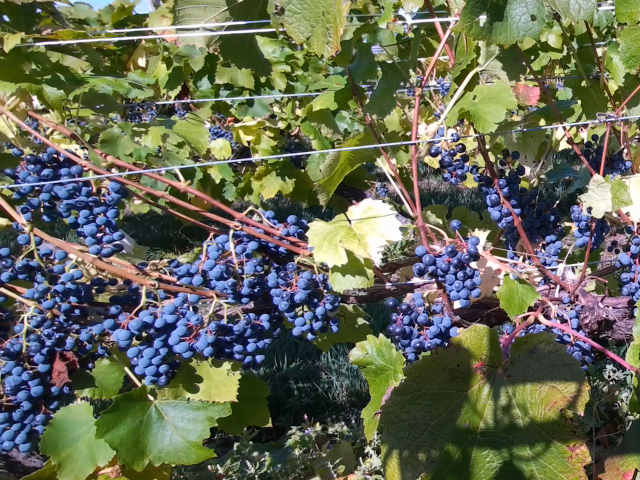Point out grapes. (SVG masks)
Returning a JSON list of instances; mask_svg holds the SVG:
<instances>
[{"mask_svg":"<svg viewBox=\"0 0 640 480\" xmlns=\"http://www.w3.org/2000/svg\"><path fill=\"white\" fill-rule=\"evenodd\" d=\"M633 162L629 160H623L619 154H614L611 157V164L607 165L604 169V173L608 175V179L613 181L615 176H619L621 173H625L631 169Z\"/></svg>","mask_w":640,"mask_h":480,"instance_id":"grapes-16","label":"grapes"},{"mask_svg":"<svg viewBox=\"0 0 640 480\" xmlns=\"http://www.w3.org/2000/svg\"><path fill=\"white\" fill-rule=\"evenodd\" d=\"M216 244H208L206 247L207 260L202 263V270L199 266L203 259V254L199 253L193 262L180 264L178 259L172 258L168 262L166 271H172L171 276L176 277L182 285H192L201 287L207 285L210 290H217L226 293V301L229 304L238 303L247 305L251 299L262 297L269 291L271 303L277 306L278 312L282 315L246 313L243 319L237 324L221 318L219 321H211L207 328H203L194 335V341L189 344L182 337L189 338L193 330L187 325H201L204 321L202 314H197L188 307L197 304L202 296L179 292L176 300L166 303L161 309L151 307L141 310L137 318L127 322V328H120L114 318L103 319L101 323L89 321L87 324H80L87 314L86 307H75L73 303L86 304L94 300V292L104 293L106 286H117L119 281L116 278H109L107 281L102 277H95L85 282H73L84 276L83 270H75L76 264L68 260L63 265H55L48 268L50 274V285H44L48 277L44 273L43 267L36 260L23 259L15 264L10 259L11 249L2 247L0 249V269L4 270L0 274V283H10L11 281L24 280L33 282V287L25 291L23 298L36 301L40 306L34 308L30 315V327L41 330V333L32 332L25 336L28 342L26 354L33 358L32 362L37 365L36 371L45 374L51 367L50 362H45L55 351L72 350L76 347L75 337L69 333L78 334L81 343L88 342L94 335L101 334L107 330L111 334V339L117 343L118 350L126 353L129 364L135 366V375H145L146 385L157 384L165 387L170 384V380L176 377V371L181 366L179 360L170 363H162L171 348V352L180 355L182 360L191 358L195 353H202L205 358L215 357L217 361L236 360L243 365L262 364L266 360L264 353L251 354L257 349H268L271 343L282 334L286 325L282 323L284 317L290 324H293L289 331L290 337H301L307 333L306 340L314 341L317 332L336 334L339 332L340 319L326 315L327 312H337L342 302L338 295L324 294L323 301L317 298L308 299L312 291L319 288L332 290L330 282L327 281L326 273L314 275L312 271H299L297 290L283 291L281 286L288 288L294 280L293 272L298 269L296 262H288L286 265L271 263L273 269L263 277L257 275L253 279H244L241 288L238 290V283L235 279L236 264L234 259H229L222 263L217 260L229 252L230 243L228 233L218 234L214 238ZM210 241L209 243H214ZM302 304H306L310 311L304 312L301 316L295 309ZM57 305L61 314L56 318L49 319L45 311H52Z\"/></svg>","mask_w":640,"mask_h":480,"instance_id":"grapes-1","label":"grapes"},{"mask_svg":"<svg viewBox=\"0 0 640 480\" xmlns=\"http://www.w3.org/2000/svg\"><path fill=\"white\" fill-rule=\"evenodd\" d=\"M583 309V306L581 304H578L574 307V309H572L569 313H568V317L570 320V324H571V329L573 332H577L579 333L580 336L583 337H587L588 333L586 332L585 329H580L577 330V328L580 326V311Z\"/></svg>","mask_w":640,"mask_h":480,"instance_id":"grapes-18","label":"grapes"},{"mask_svg":"<svg viewBox=\"0 0 640 480\" xmlns=\"http://www.w3.org/2000/svg\"><path fill=\"white\" fill-rule=\"evenodd\" d=\"M106 189L108 191L102 194L105 199L103 202L99 197H90L92 185L89 180L41 186L42 192L38 198H30L18 210L30 222L33 219L32 210H38L43 203L46 211L40 216L42 222H55L58 216L67 219L68 227L76 229V236L85 239V243L91 246V255L111 258L125 250L122 243H115L125 238V233L117 226L116 218L120 216V209L116 206L121 198H129L131 192L123 188L120 182L114 181H109Z\"/></svg>","mask_w":640,"mask_h":480,"instance_id":"grapes-2","label":"grapes"},{"mask_svg":"<svg viewBox=\"0 0 640 480\" xmlns=\"http://www.w3.org/2000/svg\"><path fill=\"white\" fill-rule=\"evenodd\" d=\"M424 306L425 300L423 299V294L414 292L412 294V302H401L399 304V311L403 313L400 323H394L399 321V315L397 313H391V322L387 324L389 334L395 335L393 343L397 344L402 350H405L409 362L416 360V352L433 350L436 345L442 346L444 343L449 342L450 337H457L459 335V328L452 327L453 320L449 316L433 317L429 329L424 330L425 335L419 333L417 328L410 327L411 320H414L419 325L429 323L427 311L419 313L417 310H413L415 308H423Z\"/></svg>","mask_w":640,"mask_h":480,"instance_id":"grapes-7","label":"grapes"},{"mask_svg":"<svg viewBox=\"0 0 640 480\" xmlns=\"http://www.w3.org/2000/svg\"><path fill=\"white\" fill-rule=\"evenodd\" d=\"M94 348L92 343H86L84 346L79 345L76 348V353L80 356L88 355L84 360V368L86 370H92L95 367V362L101 357H109L111 355V351L106 347L99 345L94 352H90Z\"/></svg>","mask_w":640,"mask_h":480,"instance_id":"grapes-14","label":"grapes"},{"mask_svg":"<svg viewBox=\"0 0 640 480\" xmlns=\"http://www.w3.org/2000/svg\"><path fill=\"white\" fill-rule=\"evenodd\" d=\"M570 218L574 221L576 227L573 230V237L576 238L575 246L584 247L587 251L588 239H592L590 254L593 250H598L600 245L605 241V235L610 232V226L607 224L605 217L598 218L595 222V229L592 234L590 225L591 217L589 215H581V208L577 204L570 207Z\"/></svg>","mask_w":640,"mask_h":480,"instance_id":"grapes-11","label":"grapes"},{"mask_svg":"<svg viewBox=\"0 0 640 480\" xmlns=\"http://www.w3.org/2000/svg\"><path fill=\"white\" fill-rule=\"evenodd\" d=\"M23 338H12L5 348L0 349V379L2 393L11 404L17 405L14 411L0 413V452H9L15 445L21 452H29L33 440L28 433L42 434L46 430L44 424L48 420L46 413L38 414L32 411V398H37L45 392L42 380L35 376L32 369H26L23 353Z\"/></svg>","mask_w":640,"mask_h":480,"instance_id":"grapes-3","label":"grapes"},{"mask_svg":"<svg viewBox=\"0 0 640 480\" xmlns=\"http://www.w3.org/2000/svg\"><path fill=\"white\" fill-rule=\"evenodd\" d=\"M271 237H274V238H276V239H278V240H280V241H282V242H286L287 244H290V245H291V242H290V241H287V240H285V239H283V238H280L279 236H276V235H274V234H271Z\"/></svg>","mask_w":640,"mask_h":480,"instance_id":"grapes-23","label":"grapes"},{"mask_svg":"<svg viewBox=\"0 0 640 480\" xmlns=\"http://www.w3.org/2000/svg\"><path fill=\"white\" fill-rule=\"evenodd\" d=\"M260 214L264 216V219L268 221L271 225H274L276 228H281L283 226L282 222H279L278 219H274L275 211L274 210H261Z\"/></svg>","mask_w":640,"mask_h":480,"instance_id":"grapes-21","label":"grapes"},{"mask_svg":"<svg viewBox=\"0 0 640 480\" xmlns=\"http://www.w3.org/2000/svg\"><path fill=\"white\" fill-rule=\"evenodd\" d=\"M611 245L612 246L607 248V251L609 253L614 251V253L618 255L614 266L621 268L623 265H629L630 267V270L620 274V281L625 283L620 289V294L625 297H630L633 301H638L640 299V263L635 259L640 252V237L638 235L631 237L628 253L621 252L619 248L614 250L613 247L618 245L616 240H613Z\"/></svg>","mask_w":640,"mask_h":480,"instance_id":"grapes-10","label":"grapes"},{"mask_svg":"<svg viewBox=\"0 0 640 480\" xmlns=\"http://www.w3.org/2000/svg\"><path fill=\"white\" fill-rule=\"evenodd\" d=\"M56 150L48 147L46 153L41 156L24 152L14 147L11 151L13 157H22L25 167L17 165L15 168L6 167L4 174L13 179V183H21L28 181H47L58 178L75 177L83 172V167L71 160L64 154H60L59 158L54 155Z\"/></svg>","mask_w":640,"mask_h":480,"instance_id":"grapes-8","label":"grapes"},{"mask_svg":"<svg viewBox=\"0 0 640 480\" xmlns=\"http://www.w3.org/2000/svg\"><path fill=\"white\" fill-rule=\"evenodd\" d=\"M601 154H602V147L598 146L595 150V157L594 158H590L591 155V151L589 149L585 150V160L588 161V165L595 171V172H599L600 171V164H601Z\"/></svg>","mask_w":640,"mask_h":480,"instance_id":"grapes-20","label":"grapes"},{"mask_svg":"<svg viewBox=\"0 0 640 480\" xmlns=\"http://www.w3.org/2000/svg\"><path fill=\"white\" fill-rule=\"evenodd\" d=\"M39 257L47 259L53 255V259L57 261L65 260L68 257V252L63 249H56L54 252L50 247H41L38 250Z\"/></svg>","mask_w":640,"mask_h":480,"instance_id":"grapes-19","label":"grapes"},{"mask_svg":"<svg viewBox=\"0 0 640 480\" xmlns=\"http://www.w3.org/2000/svg\"><path fill=\"white\" fill-rule=\"evenodd\" d=\"M499 172L500 175L497 186L500 188L502 196L510 199V205H512V209H514L516 215L523 218L522 228L525 229L527 238L531 243H539L541 236L547 242L544 247L545 253L536 251V255L542 262V265L545 267L553 263L559 264L558 254L562 252V242L558 240V236L554 234L555 231H563L562 225L556 226L557 223L561 221V218L557 216L559 209L553 207L550 210V215L545 216L543 215V211L546 209V206L553 205V200L547 199L545 203L539 202L536 209V215L539 218L535 219L533 209L528 207V202L537 197V191L531 190L529 196L525 197L527 189L525 187L519 189V184L521 183L519 176L525 175V166L519 164L516 171H509V176H505L506 170L503 168H500Z\"/></svg>","mask_w":640,"mask_h":480,"instance_id":"grapes-5","label":"grapes"},{"mask_svg":"<svg viewBox=\"0 0 640 480\" xmlns=\"http://www.w3.org/2000/svg\"><path fill=\"white\" fill-rule=\"evenodd\" d=\"M234 241H240L235 245L234 258L235 259H250L243 261V269L238 268L237 274H252V273H261L264 270L265 265L270 264V257L264 256L262 259L251 258L252 254L255 250H258L260 247V243L262 245H266L270 251L277 252L280 256H285L288 254V249L283 247H279L274 243L267 242L263 238H253L252 235L247 234L244 231L235 230L233 233Z\"/></svg>","mask_w":640,"mask_h":480,"instance_id":"grapes-9","label":"grapes"},{"mask_svg":"<svg viewBox=\"0 0 640 480\" xmlns=\"http://www.w3.org/2000/svg\"><path fill=\"white\" fill-rule=\"evenodd\" d=\"M462 242L467 244V253L457 251L455 245H446L444 253L430 254L423 244L416 245L414 255L422 258L411 266L412 273L417 278H435L439 283H445V294L450 301H459V307L466 309L472 305V299H479L482 295L483 284L481 270L474 269L471 262H478L480 254L477 235L463 236Z\"/></svg>","mask_w":640,"mask_h":480,"instance_id":"grapes-4","label":"grapes"},{"mask_svg":"<svg viewBox=\"0 0 640 480\" xmlns=\"http://www.w3.org/2000/svg\"><path fill=\"white\" fill-rule=\"evenodd\" d=\"M285 223L288 227L281 230L282 235H290L297 239H303L305 237V231L308 227V221L306 219H299L296 215L290 214L286 217Z\"/></svg>","mask_w":640,"mask_h":480,"instance_id":"grapes-15","label":"grapes"},{"mask_svg":"<svg viewBox=\"0 0 640 480\" xmlns=\"http://www.w3.org/2000/svg\"><path fill=\"white\" fill-rule=\"evenodd\" d=\"M466 151V145L464 143H457L455 148H451L448 151H442L441 146L430 147L429 156L431 158H437L439 155L441 158L438 160L439 167L441 169H447V173L441 175L443 182H448L451 186H457L459 183L468 180L467 173L473 176L474 183L484 182L479 186V190L485 193L483 200L486 201L488 206L487 212L493 222H497L499 229H505L509 226V230L504 232L505 248L511 250L507 252V258L512 261H519V257L512 251L516 250L518 244L519 232L516 227L513 226L512 213L507 207H502L500 196L495 187L492 186L493 181L490 177L479 173V168L476 165L466 164L469 161L467 154H462L458 159H454L457 153H464Z\"/></svg>","mask_w":640,"mask_h":480,"instance_id":"grapes-6","label":"grapes"},{"mask_svg":"<svg viewBox=\"0 0 640 480\" xmlns=\"http://www.w3.org/2000/svg\"><path fill=\"white\" fill-rule=\"evenodd\" d=\"M34 191V187H23V188H18V190H15L12 193V198L15 201H23L26 198V194H30Z\"/></svg>","mask_w":640,"mask_h":480,"instance_id":"grapes-22","label":"grapes"},{"mask_svg":"<svg viewBox=\"0 0 640 480\" xmlns=\"http://www.w3.org/2000/svg\"><path fill=\"white\" fill-rule=\"evenodd\" d=\"M73 394V388L68 384L60 386L51 385L47 390V407L49 409H55L60 405V398L62 395L71 396Z\"/></svg>","mask_w":640,"mask_h":480,"instance_id":"grapes-17","label":"grapes"},{"mask_svg":"<svg viewBox=\"0 0 640 480\" xmlns=\"http://www.w3.org/2000/svg\"><path fill=\"white\" fill-rule=\"evenodd\" d=\"M123 285L127 288V291L131 294L124 295L123 297H118L116 295H112L110 297L111 307L109 308V314L111 316H117V320L119 322L125 323L127 318L130 316V312L134 309V307L141 302V292L140 286L138 284H133V281L130 279H125L123 281Z\"/></svg>","mask_w":640,"mask_h":480,"instance_id":"grapes-13","label":"grapes"},{"mask_svg":"<svg viewBox=\"0 0 640 480\" xmlns=\"http://www.w3.org/2000/svg\"><path fill=\"white\" fill-rule=\"evenodd\" d=\"M546 329L549 333L558 335L555 338V341L557 343L567 345L565 352L573 356L577 361H582L583 359L587 363H592L594 361L595 354L592 352L591 345L584 341H576L574 343L570 339L571 335L568 332H564L560 327L549 326L547 328V326L542 325V323H531L527 329H521V332L518 333V337H525L528 333H544Z\"/></svg>","mask_w":640,"mask_h":480,"instance_id":"grapes-12","label":"grapes"}]
</instances>
